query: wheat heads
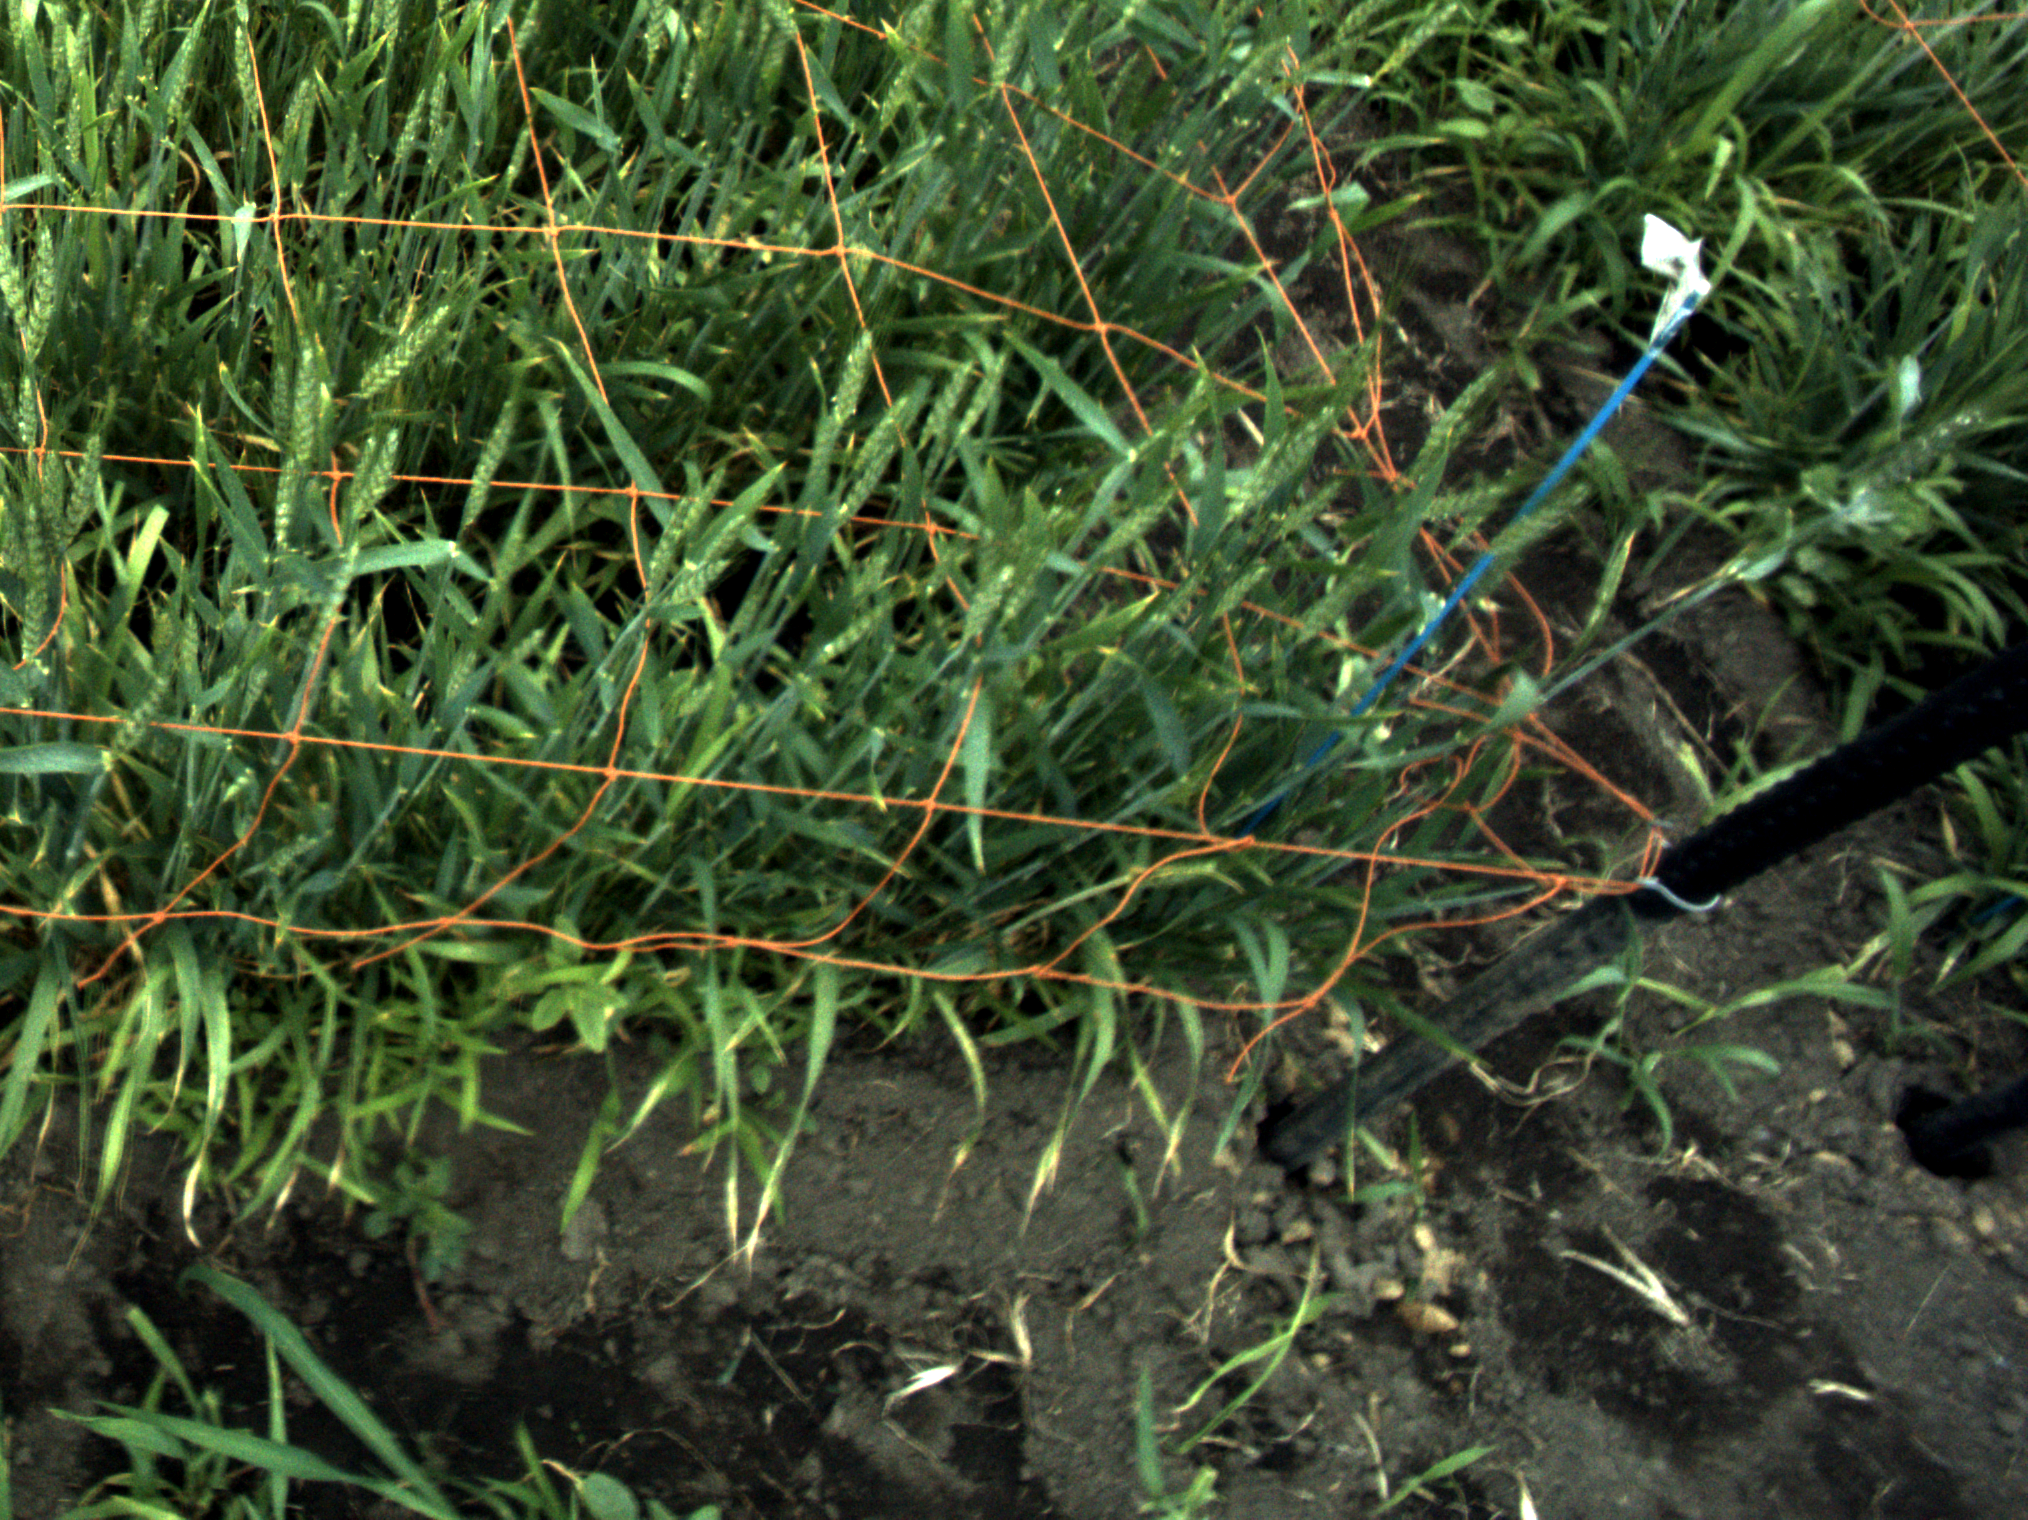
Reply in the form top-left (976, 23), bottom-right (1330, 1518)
top-left (1098, 486), bottom-right (1178, 555)
top-left (66, 89), bottom-right (82, 160)
top-left (1209, 567), bottom-right (1270, 623)
top-left (106, 64), bottom-right (129, 137)
top-left (60, 435), bottom-right (107, 549)
top-left (347, 436), bottom-right (379, 501)
top-left (243, 669), bottom-right (269, 708)
top-left (20, 223), bottom-right (59, 362)
top-left (693, 0), bottom-right (722, 42)
top-left (213, 664), bottom-right (238, 686)
top-left (1252, 406), bottom-right (1338, 512)
top-left (19, 372), bottom-right (41, 445)
top-left (853, 552), bottom-right (889, 602)
top-left (350, 429), bottom-right (401, 526)
top-left (138, 0), bottom-right (173, 35)
top-left (856, 396), bottom-right (910, 468)
top-left (269, 360), bottom-right (294, 451)
top-left (987, 2), bottom-right (1029, 101)
top-left (470, 0), bottom-right (487, 15)
top-left (41, 446), bottom-right (67, 532)
top-left (0, 212), bottom-right (29, 327)
top-left (180, 609), bottom-right (202, 674)
top-left (309, 544), bottom-right (359, 651)
top-left (648, 498), bottom-right (688, 576)
top-left (503, 628), bottom-right (547, 674)
top-left (166, 42), bottom-right (196, 118)
top-left (1419, 488), bottom-right (1510, 521)
top-left (925, 427), bottom-right (950, 478)
top-left (108, 676), bottom-right (173, 754)
top-left (646, 0), bottom-right (674, 63)
top-left (424, 66), bottom-right (450, 135)
top-left (70, 9), bottom-right (94, 76)
top-left (0, 502), bottom-right (28, 578)
top-left (280, 73), bottom-right (321, 148)
top-left (504, 128), bottom-right (529, 185)
top-left (1272, 477), bottom-right (1341, 540)
top-left (819, 601), bottom-right (888, 664)
top-left (492, 530), bottom-right (523, 589)
top-left (661, 557), bottom-right (732, 603)
top-left (733, 0), bottom-right (770, 50)
top-left (446, 650), bottom-right (480, 702)
top-left (292, 350), bottom-right (319, 463)
top-left (877, 58), bottom-right (918, 129)
top-left (703, 515), bottom-right (744, 565)
top-left (1449, 475), bottom-right (1499, 545)
top-left (1335, 0), bottom-right (1419, 41)
top-left (758, 0), bottom-right (795, 43)
top-left (50, 3), bottom-right (69, 75)
top-left (464, 397), bottom-right (521, 534)
top-left (346, 0), bottom-right (374, 29)
top-left (149, 606), bottom-right (176, 655)
top-left (1377, 3), bottom-right (1459, 79)
top-left (902, 0), bottom-right (946, 47)
top-left (504, 0), bottom-right (539, 71)
top-left (357, 304), bottom-right (451, 401)
top-left (0, 377), bottom-right (22, 435)
top-left (380, 0), bottom-right (400, 41)
top-left (1163, 576), bottom-right (1199, 618)
top-left (269, 840), bottom-right (312, 878)
top-left (1168, 378), bottom-right (1205, 460)
top-left (919, 359), bottom-right (973, 445)
top-left (1123, 863), bottom-right (1217, 894)
top-left (1487, 481), bottom-right (1587, 558)
top-left (112, 116), bottom-right (127, 177)
top-left (679, 464), bottom-right (725, 543)
top-left (1414, 370), bottom-right (1497, 460)
top-left (234, 21), bottom-right (261, 115)
top-left (7, 0), bottom-right (29, 51)
top-left (980, 0), bottom-right (1010, 32)
top-left (1003, 523), bottom-right (1029, 564)
top-left (804, 418), bottom-right (838, 495)
top-left (832, 330), bottom-right (874, 423)
top-left (754, 0), bottom-right (803, 36)
top-left (754, 5), bottom-right (800, 101)
top-left (963, 567), bottom-right (1015, 639)
top-left (1005, 548), bottom-right (1047, 622)
top-left (975, 526), bottom-right (1004, 586)
top-left (957, 350), bottom-right (1007, 437)
top-left (271, 458), bottom-right (300, 545)
top-left (924, 545), bottom-right (954, 596)
top-left (342, 130), bottom-right (361, 181)
top-left (837, 440), bottom-right (896, 521)
top-left (22, 504), bottom-right (51, 666)
top-left (1227, 428), bottom-right (1292, 522)
top-left (1228, 35), bottom-right (1287, 98)
top-left (682, 47), bottom-right (703, 101)
top-left (1872, 408), bottom-right (1982, 491)
top-left (397, 88), bottom-right (427, 165)
top-left (364, 0), bottom-right (387, 36)
top-left (936, 610), bottom-right (952, 642)
top-left (727, 592), bottom-right (763, 640)
top-left (1298, 561), bottom-right (1378, 644)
